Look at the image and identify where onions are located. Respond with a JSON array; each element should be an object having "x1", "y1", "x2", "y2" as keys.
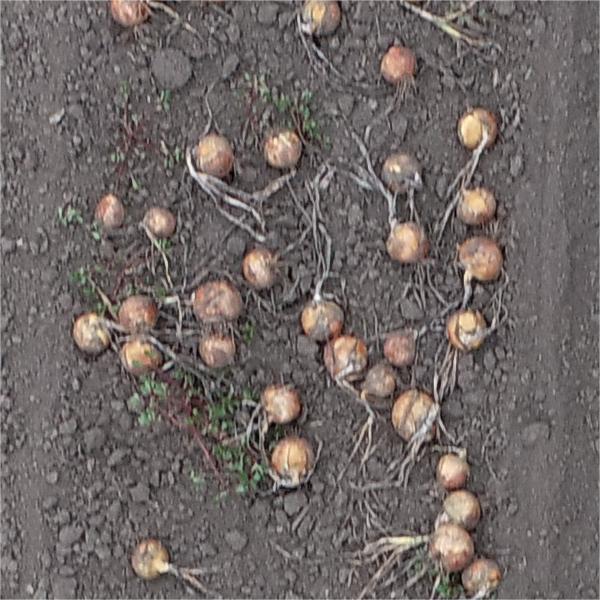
[
  {"x1": 430, "y1": 522, "x2": 473, "y2": 571},
  {"x1": 142, "y1": 206, "x2": 176, "y2": 236},
  {"x1": 385, "y1": 222, "x2": 424, "y2": 261},
  {"x1": 435, "y1": 451, "x2": 469, "y2": 489},
  {"x1": 109, "y1": 1, "x2": 149, "y2": 29},
  {"x1": 326, "y1": 336, "x2": 366, "y2": 377},
  {"x1": 131, "y1": 539, "x2": 168, "y2": 578},
  {"x1": 73, "y1": 311, "x2": 111, "y2": 352},
  {"x1": 381, "y1": 330, "x2": 413, "y2": 364},
  {"x1": 391, "y1": 391, "x2": 438, "y2": 439},
  {"x1": 119, "y1": 293, "x2": 157, "y2": 329},
  {"x1": 197, "y1": 329, "x2": 236, "y2": 367},
  {"x1": 377, "y1": 44, "x2": 414, "y2": 80},
  {"x1": 261, "y1": 384, "x2": 300, "y2": 423},
  {"x1": 460, "y1": 557, "x2": 503, "y2": 593},
  {"x1": 447, "y1": 309, "x2": 485, "y2": 348},
  {"x1": 194, "y1": 279, "x2": 241, "y2": 323},
  {"x1": 299, "y1": 299, "x2": 341, "y2": 338},
  {"x1": 458, "y1": 236, "x2": 501, "y2": 280},
  {"x1": 363, "y1": 365, "x2": 397, "y2": 398},
  {"x1": 121, "y1": 336, "x2": 161, "y2": 375},
  {"x1": 379, "y1": 151, "x2": 421, "y2": 189},
  {"x1": 192, "y1": 133, "x2": 233, "y2": 177},
  {"x1": 240, "y1": 245, "x2": 278, "y2": 285},
  {"x1": 297, "y1": 0, "x2": 341, "y2": 35},
  {"x1": 457, "y1": 185, "x2": 493, "y2": 221},
  {"x1": 90, "y1": 194, "x2": 125, "y2": 230},
  {"x1": 442, "y1": 490, "x2": 480, "y2": 529},
  {"x1": 263, "y1": 128, "x2": 300, "y2": 167},
  {"x1": 269, "y1": 436, "x2": 316, "y2": 481},
  {"x1": 455, "y1": 108, "x2": 494, "y2": 147}
]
